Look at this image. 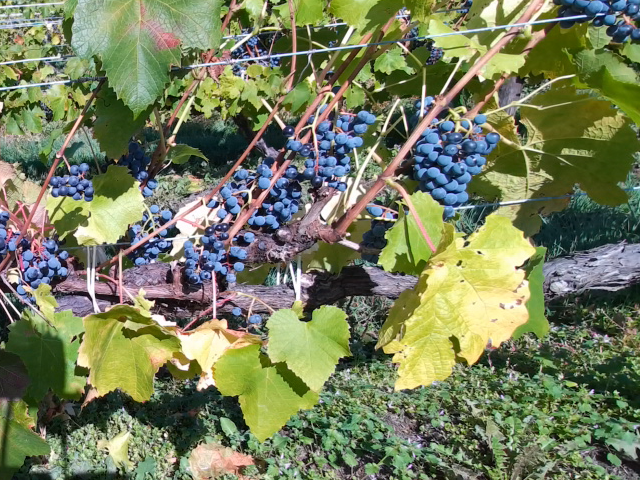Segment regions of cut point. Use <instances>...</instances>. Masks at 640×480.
Wrapping results in <instances>:
<instances>
[{
	"mask_svg": "<svg viewBox=\"0 0 640 480\" xmlns=\"http://www.w3.org/2000/svg\"><path fill=\"white\" fill-rule=\"evenodd\" d=\"M446 109L448 110V117L452 116L455 119H460L459 113H462V111L464 112V114L467 112L466 106H457L453 109L447 106Z\"/></svg>",
	"mask_w": 640,
	"mask_h": 480,
	"instance_id": "obj_1",
	"label": "cut point"
},
{
	"mask_svg": "<svg viewBox=\"0 0 640 480\" xmlns=\"http://www.w3.org/2000/svg\"><path fill=\"white\" fill-rule=\"evenodd\" d=\"M334 93L333 92H327L325 94V97L323 98V101L319 104V107L317 109V114H319V109L323 107V105L326 103L327 99L331 96L333 97Z\"/></svg>",
	"mask_w": 640,
	"mask_h": 480,
	"instance_id": "obj_2",
	"label": "cut point"
}]
</instances>
